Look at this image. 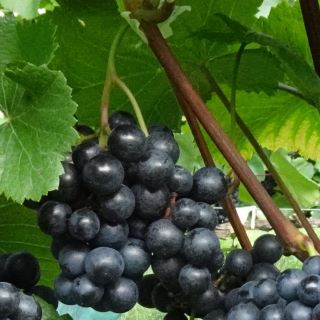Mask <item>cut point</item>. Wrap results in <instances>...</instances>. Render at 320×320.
<instances>
[{
	"mask_svg": "<svg viewBox=\"0 0 320 320\" xmlns=\"http://www.w3.org/2000/svg\"><path fill=\"white\" fill-rule=\"evenodd\" d=\"M128 22L126 19H123V22L114 38L110 53H109V63H108V68H107V73H106V78H105V84H104V89L102 93V100H101V105H100V118H101V132L98 135V144L101 152H107L108 150V140H109V135H110V128L108 125V117H107V107H108V98H109V90L111 87V83L114 85L118 86L129 98L131 103L134 106L137 118H138V123L140 129L143 131L146 139L149 135V132L146 128V125L144 123L140 108L127 88V86L118 78L116 69L114 66V54L117 48V45L121 39V36L124 32V29L128 26Z\"/></svg>",
	"mask_w": 320,
	"mask_h": 320,
	"instance_id": "1",
	"label": "cut point"
}]
</instances>
